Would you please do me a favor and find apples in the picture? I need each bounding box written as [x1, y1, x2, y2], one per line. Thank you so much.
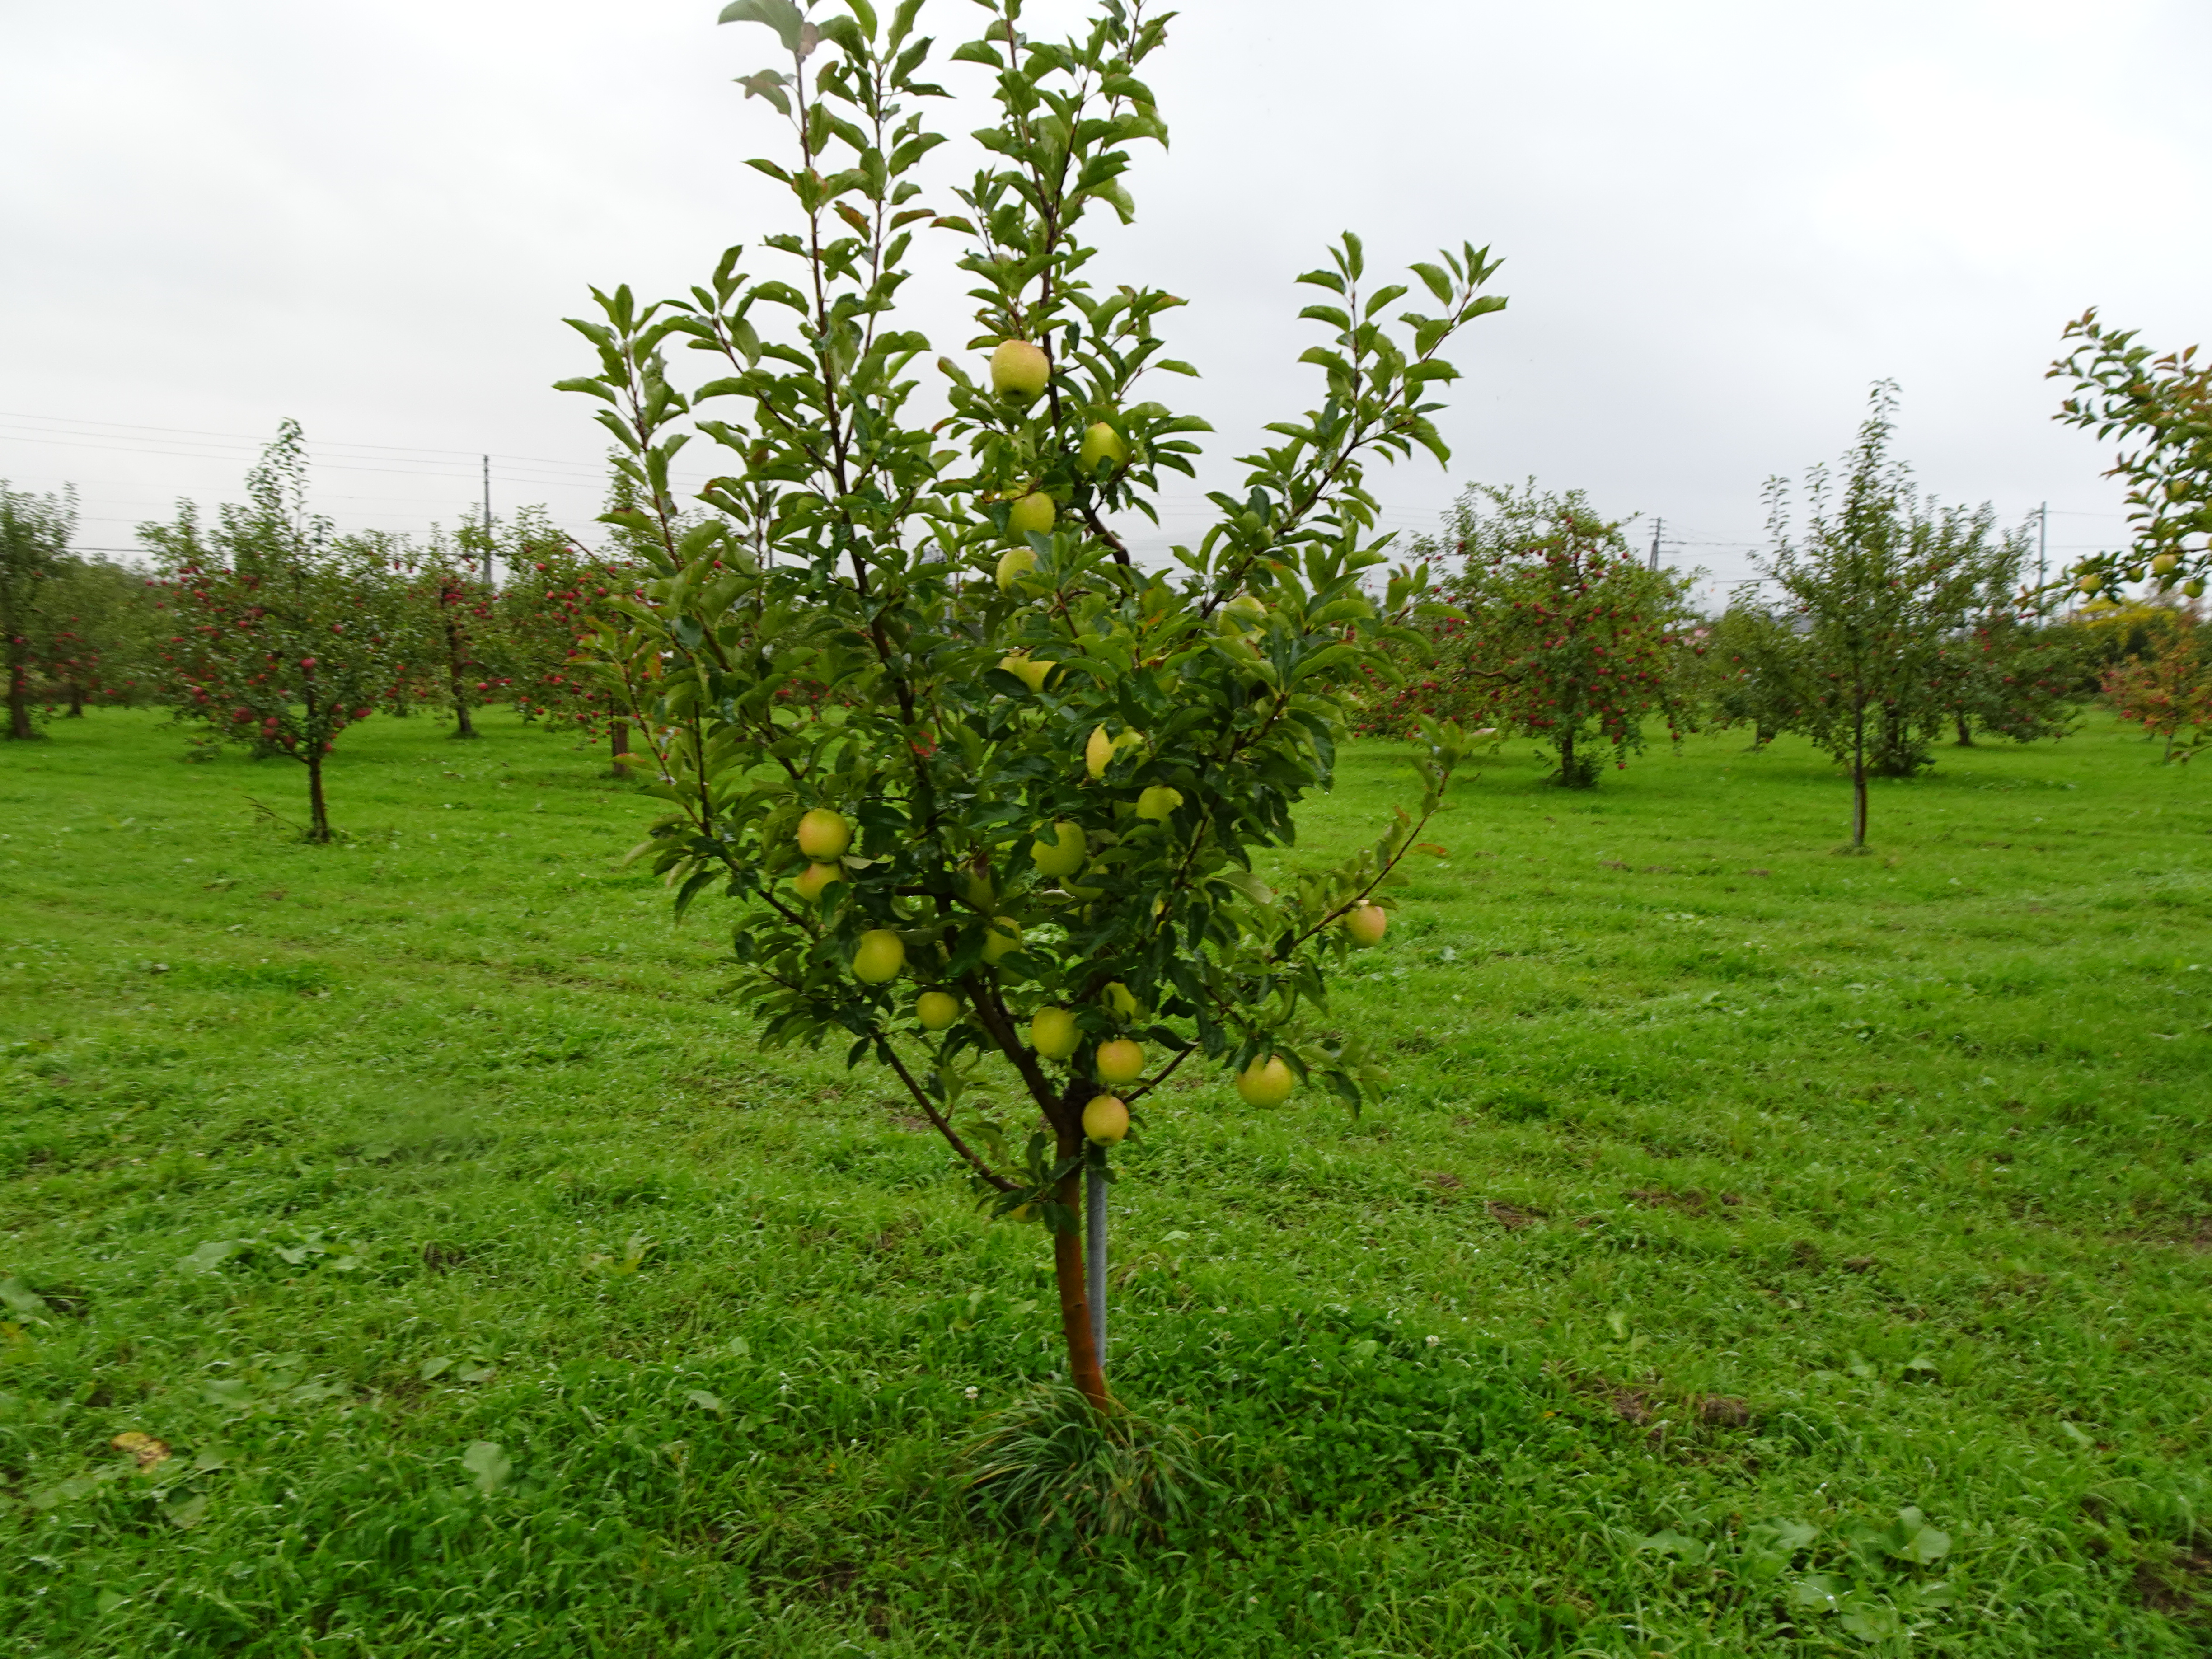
[1340, 900, 1385, 949]
[1239, 1052, 1293, 1110]
[1030, 817, 1085, 877]
[799, 808, 850, 863]
[981, 916, 1022, 967]
[990, 339, 1050, 405]
[1097, 1036, 1144, 1085]
[1136, 784, 1183, 834]
[1217, 596, 1268, 637]
[1031, 1006, 1084, 1061]
[1139, 654, 1177, 693]
[956, 859, 996, 911]
[852, 929, 905, 984]
[1082, 1095, 1130, 1146]
[1059, 856, 1110, 902]
[1080, 422, 1126, 477]
[916, 991, 959, 1031]
[1014, 654, 1066, 694]
[996, 548, 1047, 602]
[1004, 482, 1055, 546]
[999, 649, 1025, 673]
[996, 964, 1028, 986]
[794, 861, 844, 902]
[1087, 721, 1149, 779]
